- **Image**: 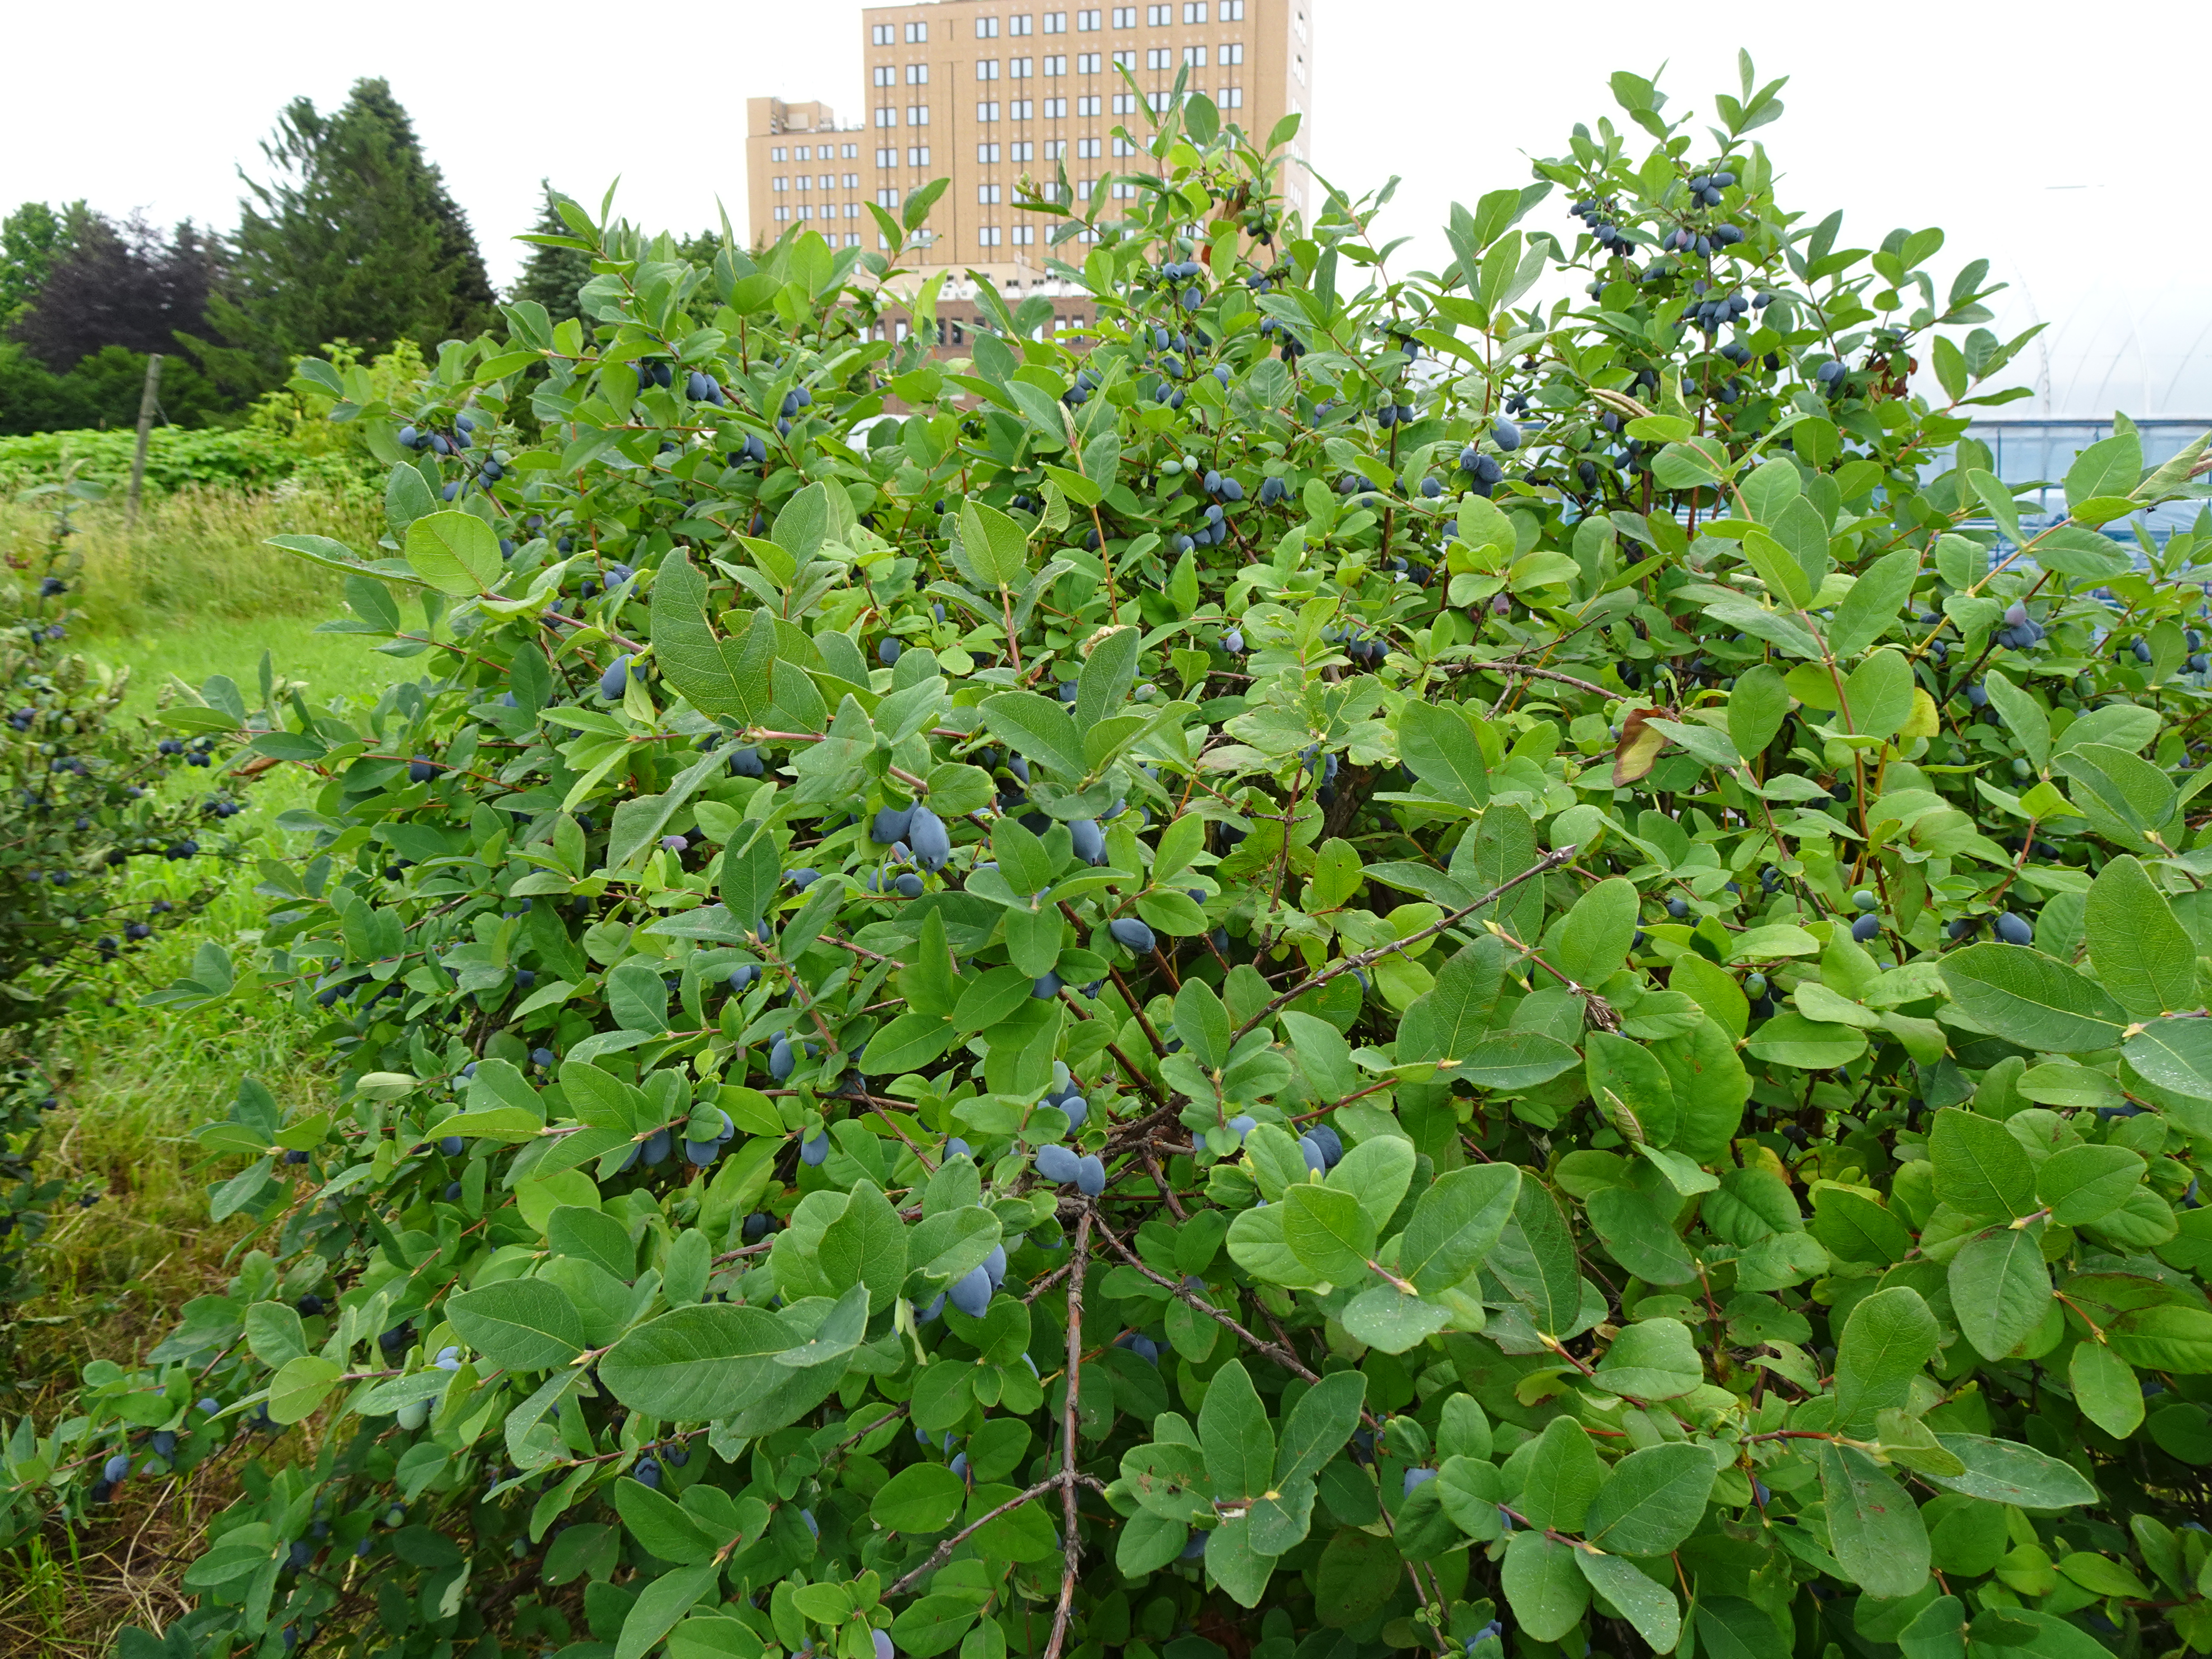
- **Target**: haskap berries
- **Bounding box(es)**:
[1597,283,1610,294]
[826,1081,846,1096]
[1472,473,1492,499]
[645,1437,669,1463]
[1505,400,1517,414]
[1826,387,1836,400]
[1640,370,1655,386]
[1651,266,1665,278]
[1771,984,1791,1002]
[1601,220,1610,226]
[1683,303,1701,319]
[2024,617,2046,640]
[1095,839,1110,864]
[537,1075,548,1086]
[638,357,651,364]
[1067,820,1102,867]
[1631,461,1639,475]
[1251,218,1262,229]
[511,811,520,823]
[396,858,411,868]
[1852,913,1879,943]
[1613,242,1624,256]
[1420,475,1440,497]
[1692,918,1702,928]
[1694,280,1706,296]
[1285,255,1294,268]
[1364,645,1372,659]
[1021,1351,1039,1380]
[1745,973,1766,999]
[515,968,534,988]
[446,1181,462,1201]
[2192,654,2208,673]
[519,812,533,825]
[1184,324,1193,334]
[716,1290,728,1303]
[980,1240,1005,1293]
[934,534,940,540]
[870,802,913,843]
[2099,1098,2153,1123]
[1348,414,1357,423]
[1393,481,1397,488]
[1752,292,1769,309]
[628,363,654,389]
[1702,186,1721,206]
[1526,475,1537,486]
[1527,967,1535,983]
[1378,818,1391,829]
[633,1456,661,1490]
[636,389,641,398]
[1317,782,1335,805]
[1377,403,1398,430]
[332,956,353,999]
[1183,1274,1206,1294]
[792,868,821,890]
[458,1109,465,1115]
[1683,377,1694,392]
[106,1455,131,1483]
[371,989,384,1001]
[644,358,670,389]
[1401,762,1419,785]
[1153,476,1160,488]
[1838,1066,1863,1083]
[1570,204,1581,216]
[388,986,403,999]
[281,1557,292,1573]
[1227,632,1244,652]
[1148,474,1156,488]
[1604,410,1618,432]
[686,1137,719,1169]
[785,976,801,997]
[971,861,1000,872]
[1283,323,1296,341]
[944,1431,961,1455]
[1221,814,1250,843]
[412,431,435,451]
[662,835,688,854]
[861,515,874,530]
[732,966,752,992]
[879,637,901,664]
[1155,1341,1171,1354]
[452,427,471,447]
[765,1214,778,1233]
[1682,388,1691,395]
[1469,1643,1477,1654]
[619,1141,643,1171]
[1204,504,1223,525]
[1037,885,1058,907]
[1215,363,1235,378]
[1586,213,1600,228]
[1219,627,1236,653]
[1032,970,1064,1001]
[1319,622,1337,643]
[286,1148,308,1165]
[750,758,763,777]
[541,601,565,629]
[2178,665,2188,675]
[494,450,512,466]
[1396,477,1405,490]
[454,1015,462,1025]
[1494,591,1509,615]
[728,450,744,469]
[578,814,593,834]
[1104,529,1116,539]
[1663,228,1677,251]
[1712,172,1736,187]
[1733,633,1746,645]
[1213,368,1229,388]
[1974,927,2003,945]
[770,1038,796,1081]
[381,1327,402,1350]
[250,1402,270,1425]
[1629,439,1641,453]
[1852,889,1877,909]
[1887,329,1903,341]
[1183,454,1198,473]
[1135,664,1140,677]
[587,863,603,869]
[932,500,944,514]
[520,898,532,912]
[452,941,465,949]
[1160,357,1184,378]
[686,373,706,401]
[1198,327,1212,346]
[154,1387,165,1397]
[1228,187,1236,201]
[1356,409,1370,416]
[1028,504,1037,517]
[1614,450,1633,469]
[756,747,771,760]
[1762,866,1783,892]
[1699,299,1720,317]
[1158,375,1163,382]
[769,1028,785,1047]
[440,1137,462,1155]
[1585,281,1598,294]
[1155,329,1168,350]
[1729,292,1748,313]
[1339,475,1356,495]
[663,969,679,990]
[784,869,795,880]
[463,1062,478,1077]
[1304,744,1338,783]
[1604,239,1616,249]
[1306,1124,1343,1168]
[1264,477,1282,497]
[1489,415,1521,451]
[297,1294,318,1315]
[1538,477,1550,486]
[1066,706,1077,716]
[1110,1328,1140,1350]
[1408,567,1419,583]
[1262,178,1272,195]
[91,1479,111,1501]
[431,944,446,972]
[1813,795,1829,811]
[1195,347,1205,356]
[1829,783,1851,802]
[771,1293,786,1308]
[1375,640,1389,659]
[1298,750,1304,763]
[1999,631,2019,652]
[1262,212,1272,227]
[1382,557,1409,571]
[1907,1096,1923,1113]
[1314,403,1325,417]
[1279,478,1294,500]
[909,806,950,876]
[1145,359,1154,367]
[1514,394,1526,406]
[1984,709,1999,726]
[1722,343,1741,360]
[1806,610,1811,615]
[1732,881,1741,894]
[1212,927,1228,955]
[891,1326,899,1339]
[822,812,852,838]
[412,1141,432,1156]
[478,472,495,490]
[1966,677,1986,707]
[1488,1618,1502,1639]
[1017,496,1030,509]
[1524,469,1536,482]
[449,968,459,981]
[1581,440,1594,453]
[1580,200,1595,212]
[1815,608,1829,613]
[1397,404,1413,422]
[1380,319,1393,333]
[796,1131,804,1143]
[1688,175,1712,193]
[850,813,860,825]
[1388,823,1398,831]
[1051,1061,1069,1094]
[1178,262,1200,277]
[1616,418,1629,434]
[1747,1479,1770,1508]
[1522,361,1541,370]
[1402,341,1418,366]
[574,895,587,913]
[1351,968,1368,993]
[1038,1099,1052,1109]
[971,650,988,668]
[504,910,520,921]
[1442,520,1459,545]
[1261,486,1277,506]
[667,1433,691,1468]
[1257,1199,1267,1208]
[842,1043,868,1077]
[1626,385,1637,397]
[484,462,502,475]
[915,573,925,594]
[1280,343,1290,362]
[1163,263,1182,282]
[356,1538,370,1557]
[1171,389,1185,409]
[1736,347,1752,368]
[1664,662,1676,676]
[1012,496,1019,508]
[198,1398,222,1417]
[916,1425,932,1444]
[1705,316,1719,333]
[787,962,795,968]
[148,1429,179,1463]
[1222,477,1244,499]
[1192,1130,1208,1152]
[1642,271,1654,282]
[640,1123,670,1166]
[2185,631,2200,652]
[409,755,430,784]
[505,690,556,708]
[1599,226,1615,243]
[703,374,723,407]
[433,1358,460,1373]
[1692,192,1705,208]
[981,748,997,765]
[1076,1155,1105,1194]
[1177,237,1195,253]
[756,918,772,943]
[526,514,542,529]
[1948,911,1994,941]
[1361,498,1375,508]
[924,532,934,554]
[1675,227,1687,245]
[532,1047,555,1067]
[1036,1145,1082,1184]
[1293,343,1305,355]
[1724,230,1745,245]
[740,434,749,453]
[1641,444,1650,455]
[1060,397,1072,410]
[948,1263,996,1318]
[1162,460,1182,475]
[1729,375,1741,396]
[1689,659,1708,673]
[447,438,460,455]
[677,498,695,519]
[437,1346,460,1365]
[316,974,336,1006]
[2178,753,2190,768]
[1598,195,1619,209]
[1327,398,1332,404]
[1460,447,1479,470]
[649,332,658,342]
[1919,614,1930,623]
[1228,1115,1256,1140]
[1746,999,1758,1020]
[789,1638,816,1659]
[1312,415,1320,427]
[1246,222,1259,237]
[2005,599,2026,629]
[1087,528,1101,550]
[2011,625,2036,648]
[1294,1121,1305,1133]
[1604,213,1613,221]
[1716,224,1739,241]
[1881,962,1894,970]
[1781,438,1793,451]
[867,862,898,892]
[1725,881,1735,893]
[1591,289,1600,301]
[1989,631,1996,643]
[455,413,475,433]
[1616,227,1629,243]
[1728,311,1740,323]
[1002,792,1029,814]
[1324,404,1334,412]
[1000,1230,1023,1254]
[1467,1628,1496,1643]
[702,1110,734,1145]
[775,357,782,369]
[434,766,446,778]
[1079,976,1103,999]
[1624,671,1642,692]
[2136,643,2153,662]
[1179,536,1195,554]
[1596,1110,1608,1122]
[691,734,720,749]
[1609,725,1622,739]
[1627,540,1643,564]
[993,751,1028,797]
[776,415,783,429]
[1680,231,1696,253]
[745,1210,766,1238]
[1946,749,1966,765]
[1418,566,1434,585]
[940,666,949,674]
[961,420,975,432]
[1188,889,1206,904]
[1477,455,1503,484]
[400,426,417,447]
[2132,637,2142,653]
[1111,918,1156,953]
[556,536,575,552]
[580,580,596,599]
[1618,661,1631,680]
[947,1452,975,1485]
[1258,227,1271,246]
[1817,360,1838,380]
[1358,476,1376,490]
[1751,431,1757,440]
[305,1521,329,1535]
[1212,516,1226,546]
[1763,351,1779,370]
[534,530,546,538]
[1182,288,1201,310]
[1672,323,1678,328]
[1891,468,1913,483]
[2040,842,2060,860]
[1829,362,1846,388]
[747,514,764,537]
[1499,1512,1512,1530]
[966,746,989,767]
[2193,743,2208,754]
[1143,766,1160,780]
[912,1286,946,1324]
[1518,400,1530,418]
[387,1508,404,1527]
[1710,233,1723,251]
[1296,1137,1325,1178]
[1980,674,1988,684]
[1414,326,1425,345]
[1873,1040,1884,1050]
[1624,240,1636,256]
[351,973,376,983]
[846,1080,868,1096]
[686,827,703,838]
[1666,896,1690,918]
[933,603,946,623]
[1782,1124,1807,1141]
[1654,663,1668,680]
[747,433,767,464]
[1144,325,1161,344]
[919,1120,932,1133]
[424,766,438,784]
[392,1503,406,1517]
[492,1466,499,1478]
[398,1317,410,1335]
[492,1477,502,1490]
[1246,273,1263,290]
[1090,369,1104,391]
[1935,653,1941,661]
[1138,761,1147,766]
[1334,623,1350,643]
[2015,837,2039,853]
[604,571,623,592]
[1719,383,1738,405]
[550,1402,561,1417]
[546,869,557,876]
[443,481,467,499]
[790,385,811,406]
[570,729,583,738]
[499,535,519,562]
[1350,624,1372,657]
[801,1129,829,1166]
[779,418,792,439]
[290,1539,313,1565]
[892,841,910,860]
[1100,797,1127,820]
[983,836,991,850]
[1723,413,1733,422]
[1274,320,1283,328]
[731,748,757,774]
[801,1507,818,1539]
[1912,669,1918,678]
[1775,648,1786,660]
[1591,224,1607,237]
[431,435,449,455]
[1156,383,1173,403]
[1925,613,1940,625]
[612,564,640,594]
[659,441,676,453]
[2012,777,2028,789]
[1292,336,1305,348]
[1131,1334,1159,1368]
[530,867,546,874]
[1997,911,2032,945]
[1353,1425,1374,1449]
[943,1135,971,1164]
[380,955,391,962]
[908,854,922,872]
[1216,490,1229,503]
[311,1495,323,1514]
[602,653,647,700]
[895,874,924,898]
[866,1627,896,1659]
[1732,680,1737,689]
[1017,807,1052,835]
[1065,383,1088,403]
[1262,319,1273,334]
[980,718,987,733]
[1579,462,1596,489]
[1932,639,1945,654]
[1629,916,1646,949]
[1047,1078,1080,1105]
[849,566,862,579]
[1193,526,1211,545]
[1468,606,1480,622]
[1182,1527,1211,1559]
[1623,539,1635,554]
[2006,836,2018,850]
[1714,299,1731,324]
[1959,681,1967,695]
[445,1005,461,1024]
[795,1013,817,1035]
[781,393,798,417]
[2077,709,2092,719]
[2180,1175,2198,1202]
[281,1626,297,1648]
[2013,758,2031,780]
[1827,712,1837,720]
[360,1000,375,1011]
[804,1042,819,1059]
[703,1291,713,1304]
[748,965,762,981]
[1027,1211,1063,1249]
[1163,1025,1184,1053]
[1249,180,1261,196]
[1261,279,1273,296]
[1059,1097,1087,1135]
[1059,679,1079,702]
[1438,847,1457,868]
[1619,1030,1626,1037]
[1696,309,1708,325]
[1167,486,1183,500]
[1170,331,1186,353]
[1140,805,1151,826]
[1758,994,1774,1017]
[1762,987,1769,999]
[1402,1468,1436,1500]
[1952,624,1964,638]
[385,866,400,881]
[1304,542,1309,552]
[1696,236,1710,258]
[1078,369,1094,391]
[1204,469,1221,493]
[1358,486,1377,495]
[397,1395,427,1431]
[1303,376,1309,381]
[1135,684,1156,701]
[451,1075,471,1091]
